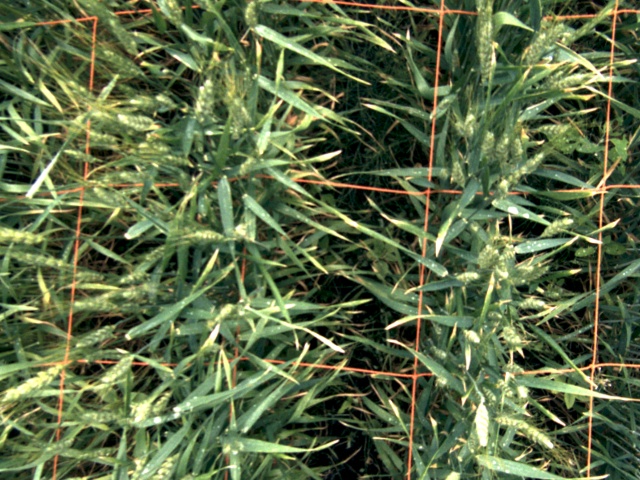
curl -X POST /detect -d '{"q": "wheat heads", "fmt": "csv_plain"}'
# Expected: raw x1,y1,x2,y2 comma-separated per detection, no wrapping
235,163,250,177
132,403,151,429
78,272,101,283
100,358,134,385
0,363,71,408
186,229,228,245
505,156,544,189
545,219,572,238
153,394,170,412
66,148,96,166
478,386,497,404
122,270,146,283
148,141,170,151
520,422,552,449
515,298,550,310
69,80,97,110
5,250,65,270
450,163,464,186
152,457,176,480
512,138,522,157
193,87,205,120
206,81,217,123
496,377,512,399
120,173,149,186
122,291,140,301
479,10,491,74
77,299,115,315
103,52,140,78
107,19,138,57
457,272,476,283
553,75,587,87
494,417,528,428
526,33,544,59
478,246,496,272
80,412,119,424
232,224,249,242
505,364,523,374
538,126,574,137
3,224,44,243
501,328,523,351
120,117,154,132
83,129,115,148
498,256,507,278
464,332,479,345
93,187,117,208
479,132,495,160
72,326,112,350
208,306,231,325
473,403,488,447
162,154,192,171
